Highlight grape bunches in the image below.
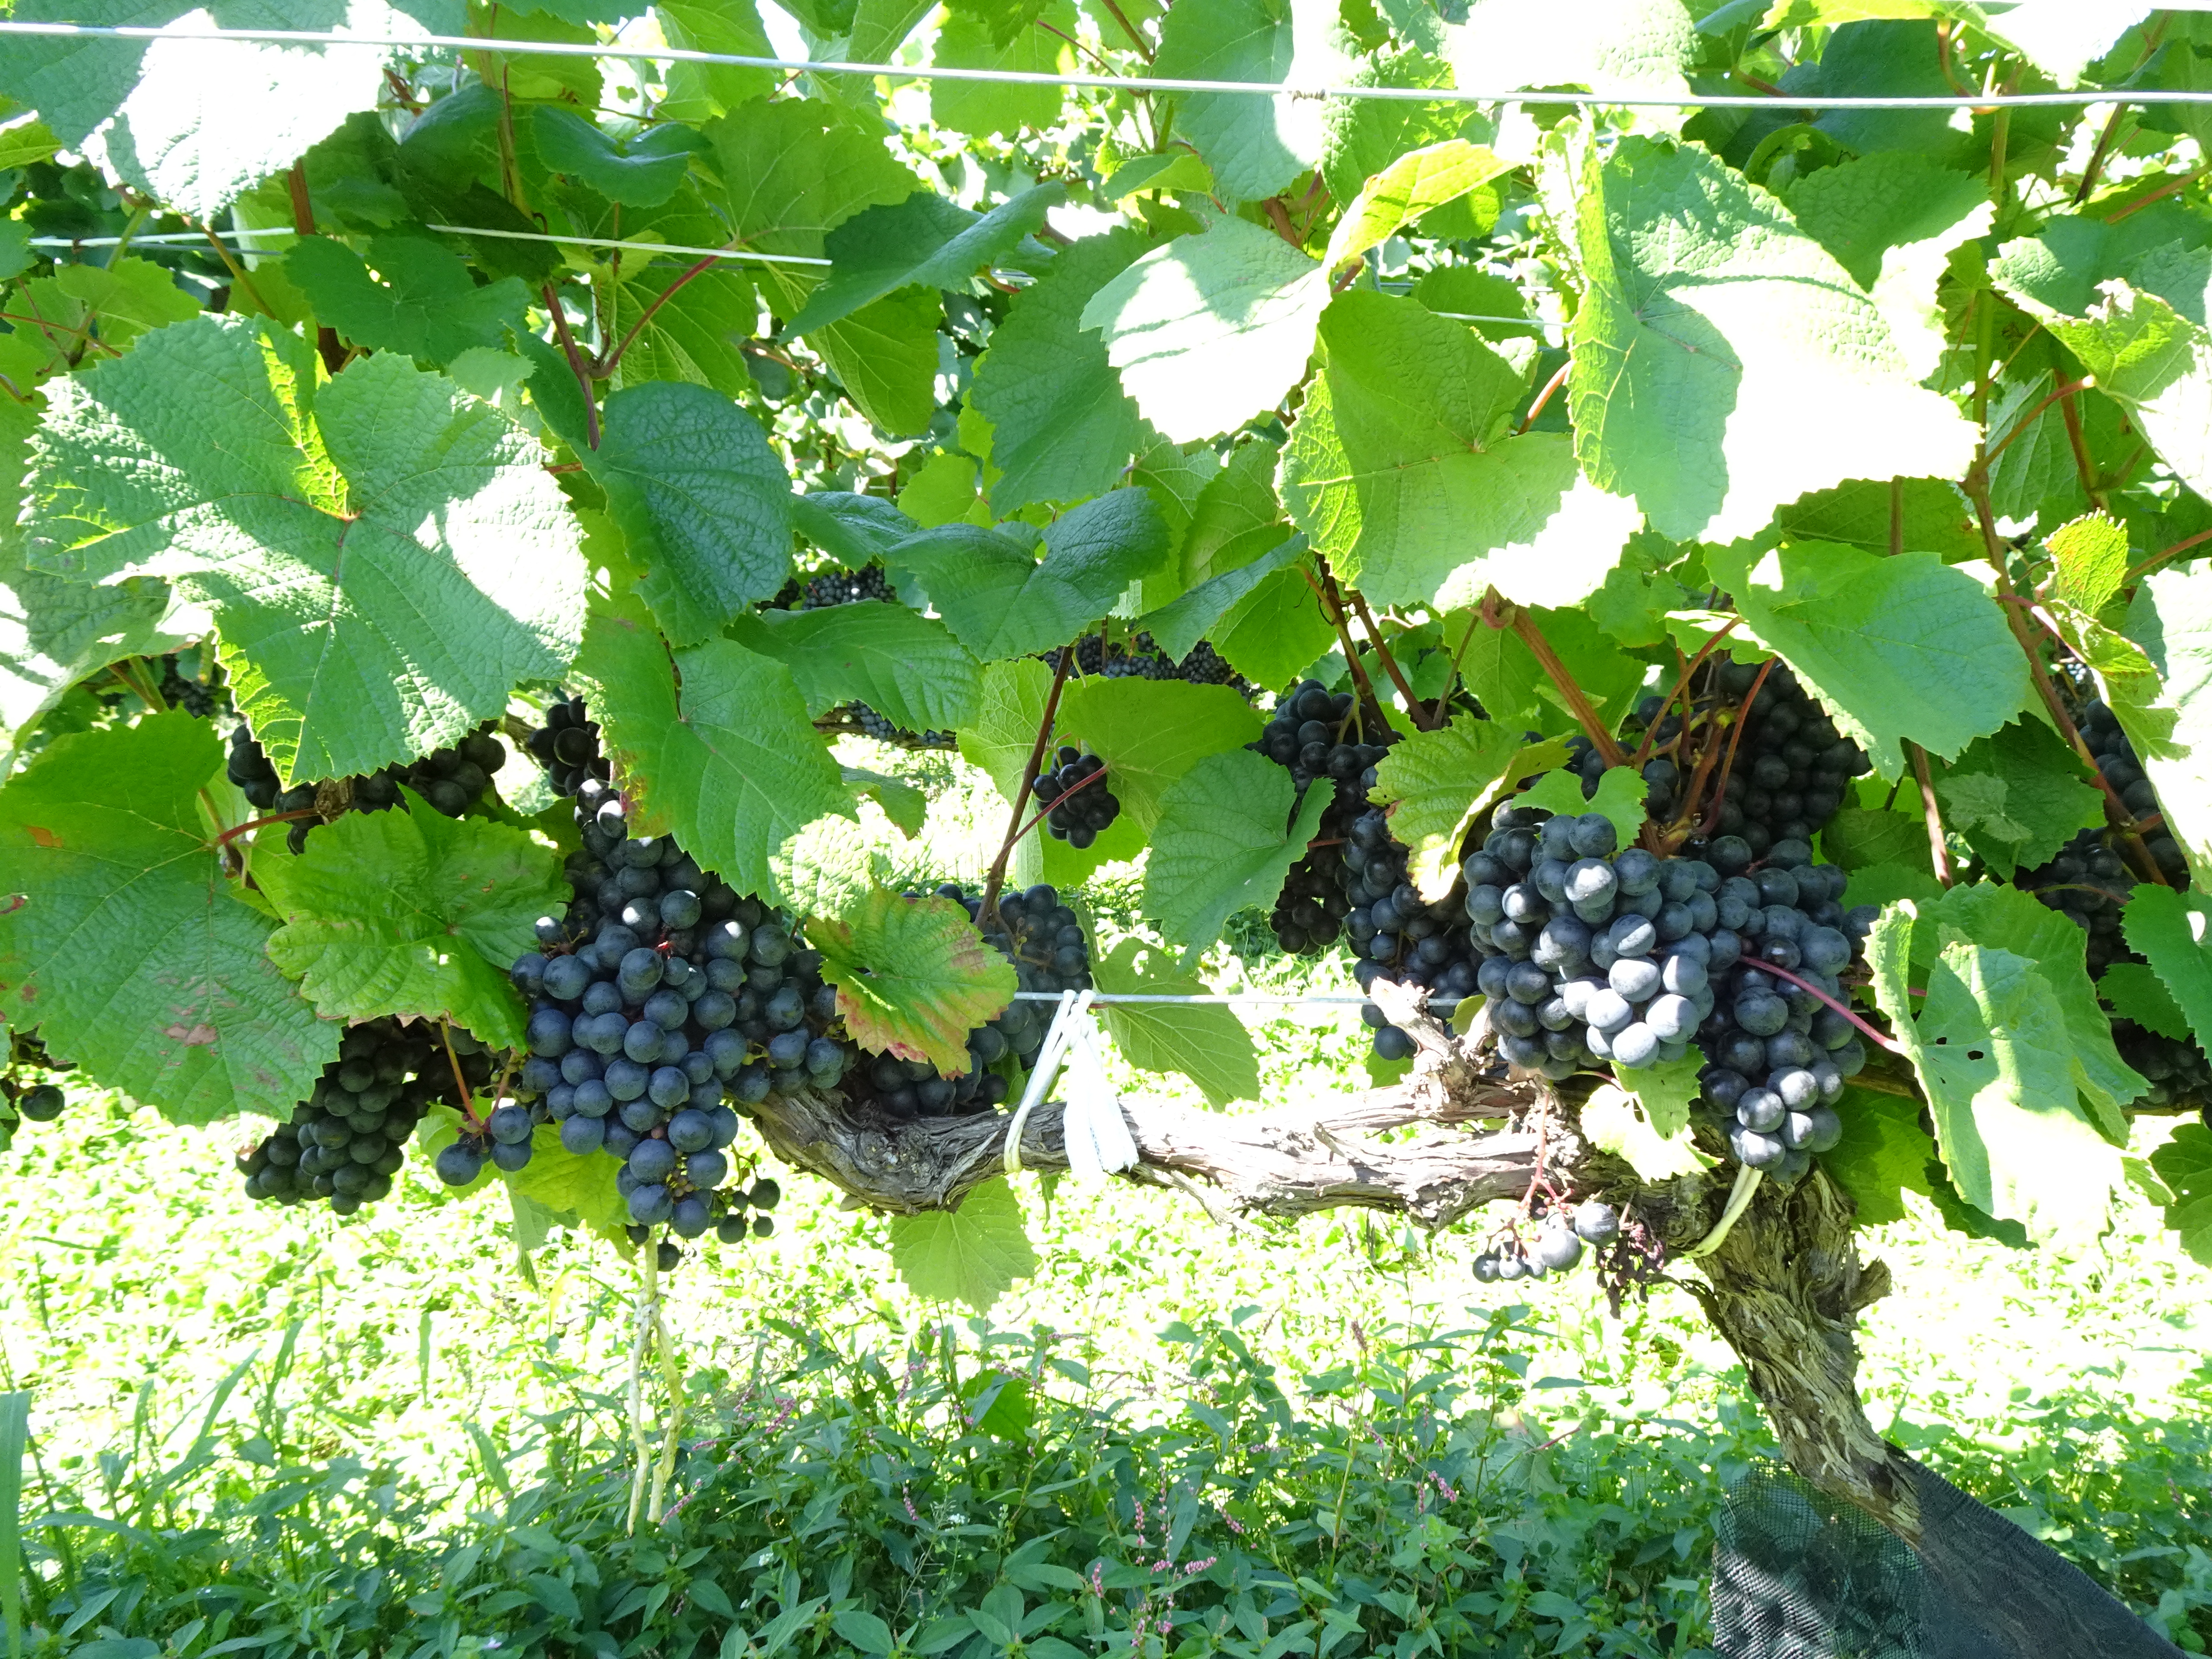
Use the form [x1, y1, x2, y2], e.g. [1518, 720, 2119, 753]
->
[1680, 658, 1871, 861]
[902, 884, 1041, 1070]
[435, 1106, 533, 1185]
[531, 695, 610, 797]
[294, 1015, 416, 1216]
[228, 718, 503, 853]
[709, 1179, 780, 1242]
[1242, 679, 1405, 956]
[392, 1011, 494, 1112]
[1335, 766, 1487, 1059]
[2078, 698, 2192, 894]
[0, 1028, 78, 1135]
[1521, 697, 1685, 823]
[236, 1120, 325, 1206]
[565, 777, 784, 968]
[1463, 799, 1720, 1079]
[2015, 826, 2212, 1132]
[1031, 745, 1119, 850]
[446, 1025, 511, 1067]
[695, 922, 861, 1104]
[781, 949, 1010, 1119]
[1469, 1198, 1620, 1286]
[997, 885, 1092, 1045]
[1695, 834, 1880, 1182]
[511, 917, 738, 1237]
[622, 1222, 682, 1269]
